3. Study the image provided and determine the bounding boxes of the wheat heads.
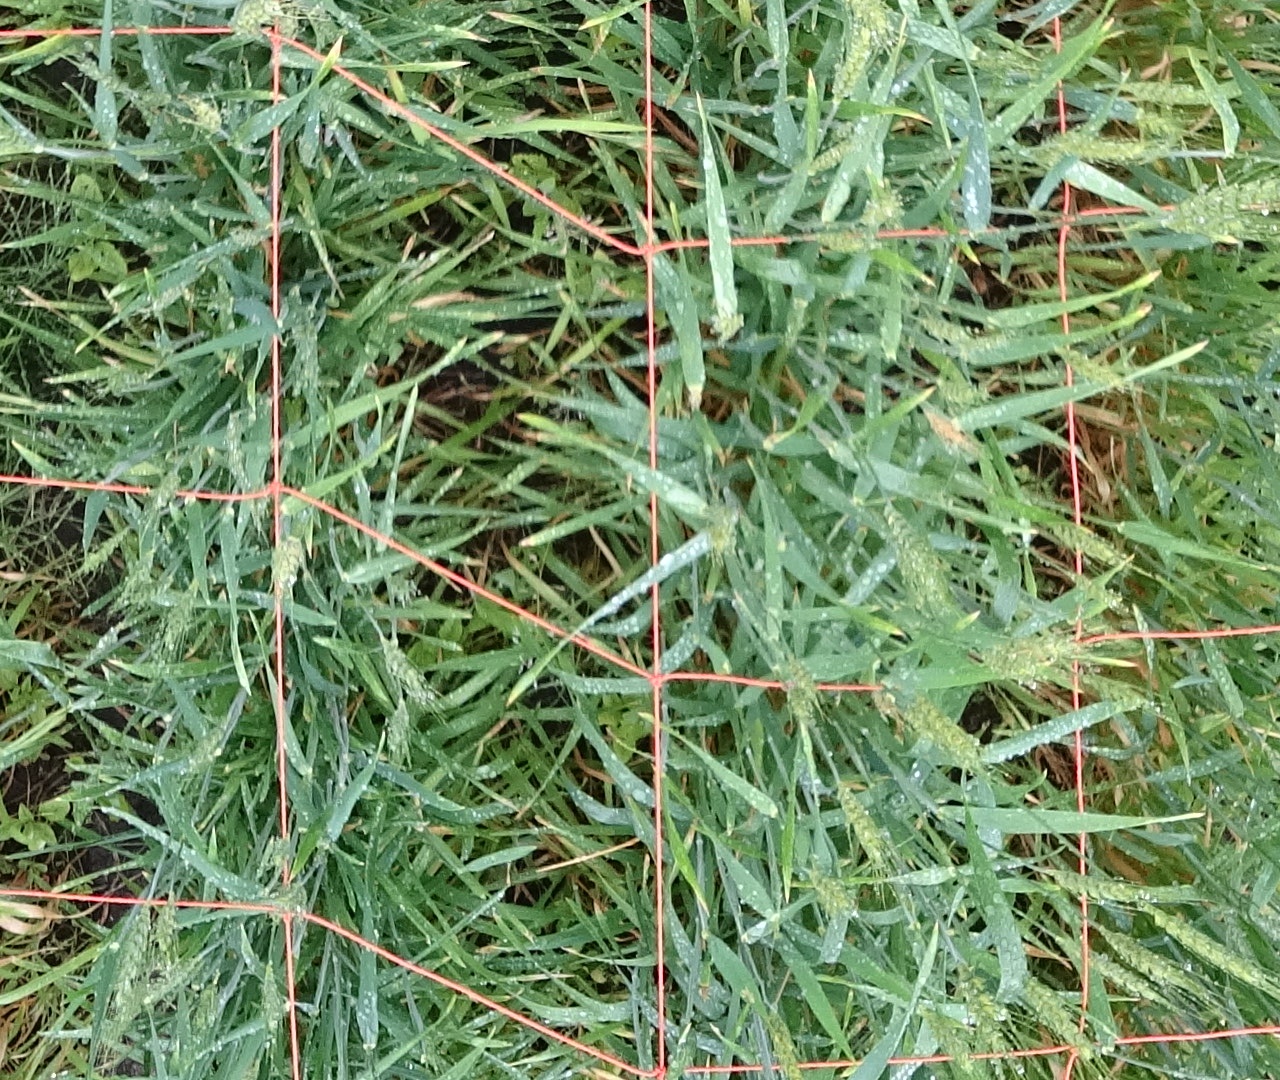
[381,641,436,705]
[149,576,199,647]
[188,94,213,132]
[266,538,301,595]
[833,785,881,851]
[137,956,195,1015]
[906,701,985,768]
[1050,341,1130,381]
[882,500,935,586]
[1089,668,1154,707]
[83,531,135,576]
[99,900,152,1010]
[1161,181,1280,226]
[779,668,822,732]
[922,316,970,343]
[795,849,855,917]
[254,979,286,1034]
[1125,79,1211,108]
[930,374,984,405]
[805,218,869,256]
[182,725,225,767]
[1044,129,1144,164]
[1018,984,1092,1056]
[833,32,874,101]
[1159,909,1267,992]
[1104,925,1195,978]
[154,891,180,950]
[1057,941,1144,1005]
[1054,510,1118,575]
[766,1009,801,1078]
[230,0,282,31]
[1045,861,1143,905]
[807,141,849,174]
[976,648,1039,681]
